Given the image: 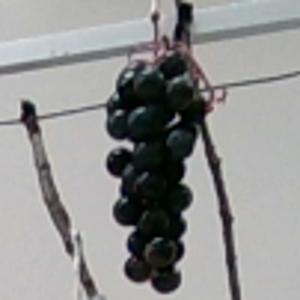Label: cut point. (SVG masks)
Returning a JSON list of instances; mask_svg holds the SVG:
<instances>
[{
    "instance_id": "6a23745f",
    "label": "cut point",
    "mask_w": 300,
    "mask_h": 300,
    "mask_svg": "<svg viewBox=\"0 0 300 300\" xmlns=\"http://www.w3.org/2000/svg\"><path fill=\"white\" fill-rule=\"evenodd\" d=\"M161 0H149V13L147 20L152 25L153 34V62L159 57L160 50V29L159 24L161 22L160 14Z\"/></svg>"
}]
</instances>
